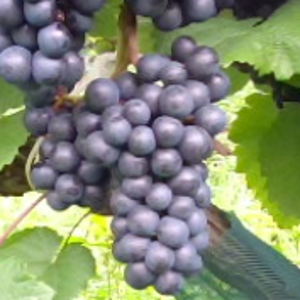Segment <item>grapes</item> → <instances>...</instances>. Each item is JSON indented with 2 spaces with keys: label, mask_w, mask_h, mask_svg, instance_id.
Instances as JSON below:
<instances>
[{
  "label": "grapes",
  "mask_w": 300,
  "mask_h": 300,
  "mask_svg": "<svg viewBox=\"0 0 300 300\" xmlns=\"http://www.w3.org/2000/svg\"><path fill=\"white\" fill-rule=\"evenodd\" d=\"M101 0H0V75L26 91L25 126L45 137L31 172L47 206L110 212L111 255L132 290L176 295L204 270L213 239L203 162L227 125L219 102L231 79L211 45L176 37L171 55L147 53L136 71L84 74L80 52Z\"/></svg>",
  "instance_id": "obj_1"
},
{
  "label": "grapes",
  "mask_w": 300,
  "mask_h": 300,
  "mask_svg": "<svg viewBox=\"0 0 300 300\" xmlns=\"http://www.w3.org/2000/svg\"><path fill=\"white\" fill-rule=\"evenodd\" d=\"M140 17H151L159 31H173L186 23L203 21L216 14L214 0H124Z\"/></svg>",
  "instance_id": "obj_2"
}]
</instances>
